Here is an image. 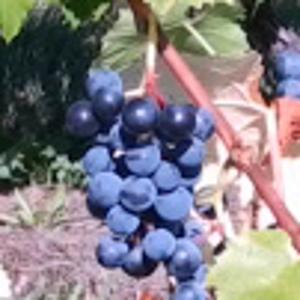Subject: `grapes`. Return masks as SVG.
I'll use <instances>...</instances> for the list:
<instances>
[{"label": "grapes", "instance_id": "obj_1", "mask_svg": "<svg viewBox=\"0 0 300 300\" xmlns=\"http://www.w3.org/2000/svg\"><path fill=\"white\" fill-rule=\"evenodd\" d=\"M83 90L86 99L68 104L64 128L71 140L94 143L79 157L89 180L86 211L114 236L96 243L98 268L144 280L165 264L176 282L170 300H207L212 268L195 242L205 219L194 206L206 143L218 131L215 115L164 106L147 84L124 91L115 71L91 74Z\"/></svg>", "mask_w": 300, "mask_h": 300}, {"label": "grapes", "instance_id": "obj_2", "mask_svg": "<svg viewBox=\"0 0 300 300\" xmlns=\"http://www.w3.org/2000/svg\"><path fill=\"white\" fill-rule=\"evenodd\" d=\"M276 78L273 89L288 100L300 98V54L294 50L279 53L273 61Z\"/></svg>", "mask_w": 300, "mask_h": 300}]
</instances>
